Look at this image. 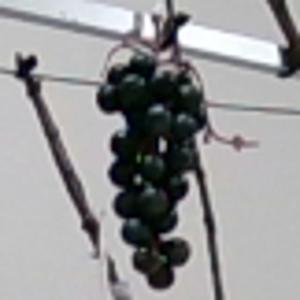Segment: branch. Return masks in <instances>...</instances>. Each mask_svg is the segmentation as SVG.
Instances as JSON below:
<instances>
[{
  "mask_svg": "<svg viewBox=\"0 0 300 300\" xmlns=\"http://www.w3.org/2000/svg\"><path fill=\"white\" fill-rule=\"evenodd\" d=\"M270 8L291 52L300 63V32L288 7L287 0H263Z\"/></svg>",
  "mask_w": 300,
  "mask_h": 300,
  "instance_id": "branch-4",
  "label": "branch"
},
{
  "mask_svg": "<svg viewBox=\"0 0 300 300\" xmlns=\"http://www.w3.org/2000/svg\"><path fill=\"white\" fill-rule=\"evenodd\" d=\"M198 135L188 139L190 148L197 151L200 157L198 168L191 173L197 187L199 206L202 207V224L205 231V244L209 259V272L211 287H213V300H227L221 265L220 250L217 241L218 229L211 194L208 188V173L203 166L201 149L197 143Z\"/></svg>",
  "mask_w": 300,
  "mask_h": 300,
  "instance_id": "branch-2",
  "label": "branch"
},
{
  "mask_svg": "<svg viewBox=\"0 0 300 300\" xmlns=\"http://www.w3.org/2000/svg\"><path fill=\"white\" fill-rule=\"evenodd\" d=\"M13 60L15 65L13 78L24 85L25 97L31 102L36 112L52 163L79 217L80 230L86 234L88 243L92 246L91 252L87 254L88 260L102 262L106 269L107 288L112 300H135L121 285L117 261L102 244L100 220L91 208L82 179L76 172L75 165L64 144L62 131L57 126L54 115L42 95V82L35 79L32 74L39 67L38 56L30 53L24 58L22 52L15 51Z\"/></svg>",
  "mask_w": 300,
  "mask_h": 300,
  "instance_id": "branch-1",
  "label": "branch"
},
{
  "mask_svg": "<svg viewBox=\"0 0 300 300\" xmlns=\"http://www.w3.org/2000/svg\"><path fill=\"white\" fill-rule=\"evenodd\" d=\"M165 16L162 23V32L159 43L158 57L163 53H169L168 60H175L183 66L182 50L179 43L180 29L190 24L193 16L184 10L176 13L175 0H163Z\"/></svg>",
  "mask_w": 300,
  "mask_h": 300,
  "instance_id": "branch-3",
  "label": "branch"
}]
</instances>
